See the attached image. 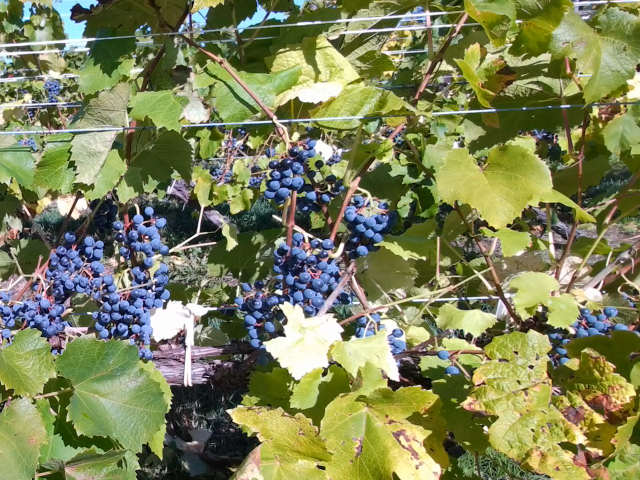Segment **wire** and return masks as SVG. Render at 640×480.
<instances>
[{
	"mask_svg": "<svg viewBox=\"0 0 640 480\" xmlns=\"http://www.w3.org/2000/svg\"><path fill=\"white\" fill-rule=\"evenodd\" d=\"M463 15L462 11H448V12H430V13H397L394 15H385L380 17H342L338 19H314L307 21H298L291 23H281L273 25H260V26H237L227 28H207L194 31H170L161 33H144L130 36H99V37H87V38H67L65 40H38L32 42L1 44V49H14V48H26L40 45H66V44H84L85 42H101V41H132L146 38H163L172 36H196L209 33H230L239 32L240 29H268V28H293L301 26H309L316 24H341L345 22H383L387 20H396L400 18H447V17H460Z\"/></svg>",
	"mask_w": 640,
	"mask_h": 480,
	"instance_id": "obj_1",
	"label": "wire"
},
{
	"mask_svg": "<svg viewBox=\"0 0 640 480\" xmlns=\"http://www.w3.org/2000/svg\"><path fill=\"white\" fill-rule=\"evenodd\" d=\"M89 48L88 47H78V48H71V49H44V50H29V49H22L20 51H14V52H0V57H16V56H22V55H46V54H73V53H80V52H88Z\"/></svg>",
	"mask_w": 640,
	"mask_h": 480,
	"instance_id": "obj_7",
	"label": "wire"
},
{
	"mask_svg": "<svg viewBox=\"0 0 640 480\" xmlns=\"http://www.w3.org/2000/svg\"><path fill=\"white\" fill-rule=\"evenodd\" d=\"M154 125H130L108 128H75V129H44V130H22V131H0V136H25V135H46V134H78V133H111L133 130H154Z\"/></svg>",
	"mask_w": 640,
	"mask_h": 480,
	"instance_id": "obj_3",
	"label": "wire"
},
{
	"mask_svg": "<svg viewBox=\"0 0 640 480\" xmlns=\"http://www.w3.org/2000/svg\"><path fill=\"white\" fill-rule=\"evenodd\" d=\"M271 119H262L256 121H230V122H206L201 124H183V129H203L209 127H232V126H258L271 124Z\"/></svg>",
	"mask_w": 640,
	"mask_h": 480,
	"instance_id": "obj_6",
	"label": "wire"
},
{
	"mask_svg": "<svg viewBox=\"0 0 640 480\" xmlns=\"http://www.w3.org/2000/svg\"><path fill=\"white\" fill-rule=\"evenodd\" d=\"M380 119H381L380 115H376V116L358 115V116L327 117V118L313 117V118H300V119H292V120L279 119L278 123L285 124V125H295V124H302V123H315V122H321V121H323L324 123H330V122H348V121H361V120L378 121Z\"/></svg>",
	"mask_w": 640,
	"mask_h": 480,
	"instance_id": "obj_5",
	"label": "wire"
},
{
	"mask_svg": "<svg viewBox=\"0 0 640 480\" xmlns=\"http://www.w3.org/2000/svg\"><path fill=\"white\" fill-rule=\"evenodd\" d=\"M454 23L446 24H420L405 27H378V28H359L355 30H342L341 34L344 36H353L362 33H380V32H408L422 29H449L454 28Z\"/></svg>",
	"mask_w": 640,
	"mask_h": 480,
	"instance_id": "obj_4",
	"label": "wire"
},
{
	"mask_svg": "<svg viewBox=\"0 0 640 480\" xmlns=\"http://www.w3.org/2000/svg\"><path fill=\"white\" fill-rule=\"evenodd\" d=\"M638 100H617V101H608V102H583V103H562L556 105H538V106H521L510 109H498V108H483V109H474V110H446L441 112H431V117H443L448 115H476V114H485V113H496V114H512L524 111H540V110H550L556 111L558 109L565 108H585V107H610V106H619V105H638Z\"/></svg>",
	"mask_w": 640,
	"mask_h": 480,
	"instance_id": "obj_2",
	"label": "wire"
}]
</instances>
